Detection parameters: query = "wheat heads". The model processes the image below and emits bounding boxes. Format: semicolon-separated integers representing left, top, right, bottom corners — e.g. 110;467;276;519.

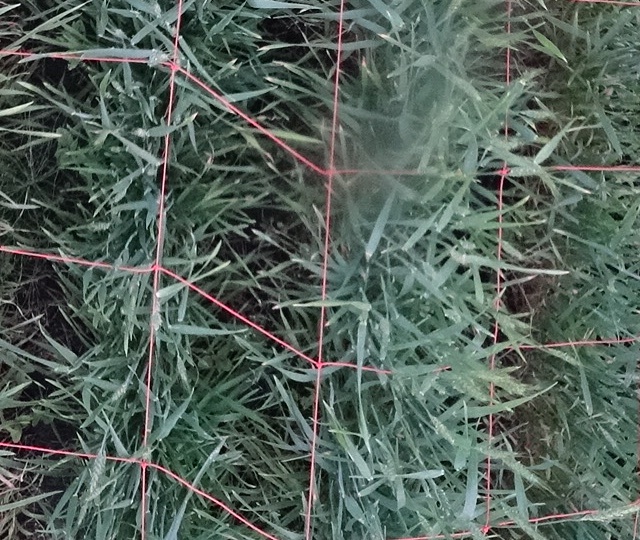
113;27;128;41
584;504;630;520
416;508;433;530
111;79;124;94
428;412;453;441
128;296;140;321
504;458;534;480
486;134;510;151
114;257;122;273
155;1;161;19
479;35;508;48
455;77;479;101
211;450;241;462
453;201;475;215
479;370;530;396
468;365;505;384
500;503;534;534
504;237;522;260
491;309;516;326
114;382;131;401
442;307;464;323
79;507;88;522
446;247;463;263
509;166;542;179
108;144;123;155
455;22;474;47
177;356;187;378
521;106;548;122
90;450;109;485
435;488;450;512
459;238;475;251
479;444;517;460
385;453;397;482
445;0;462;21
544;345;577;363
133;125;147;139
141;448;151;464
152;302;162;330
90;223;110;232
148;52;163;66
53;363;71;376
464;518;487;540
88;483;108;498
447;376;482;401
